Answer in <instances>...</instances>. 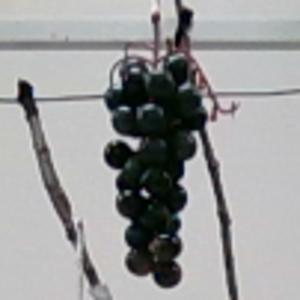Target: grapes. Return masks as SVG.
I'll use <instances>...</instances> for the list:
<instances>
[{"instance_id": "obj_1", "label": "grapes", "mask_w": 300, "mask_h": 300, "mask_svg": "<svg viewBox=\"0 0 300 300\" xmlns=\"http://www.w3.org/2000/svg\"><path fill=\"white\" fill-rule=\"evenodd\" d=\"M198 70V60L185 48L167 53L160 71H148L144 58L131 55L120 65L121 83L104 93L114 133L140 139L136 150L124 140H111L103 153L107 167L121 170L114 180V206L130 224L125 265L134 276L151 274L163 290L175 289L182 280L176 261L184 249L178 214L187 208L188 193L178 182L185 162L198 152L194 132L209 122L196 84Z\"/></svg>"}]
</instances>
